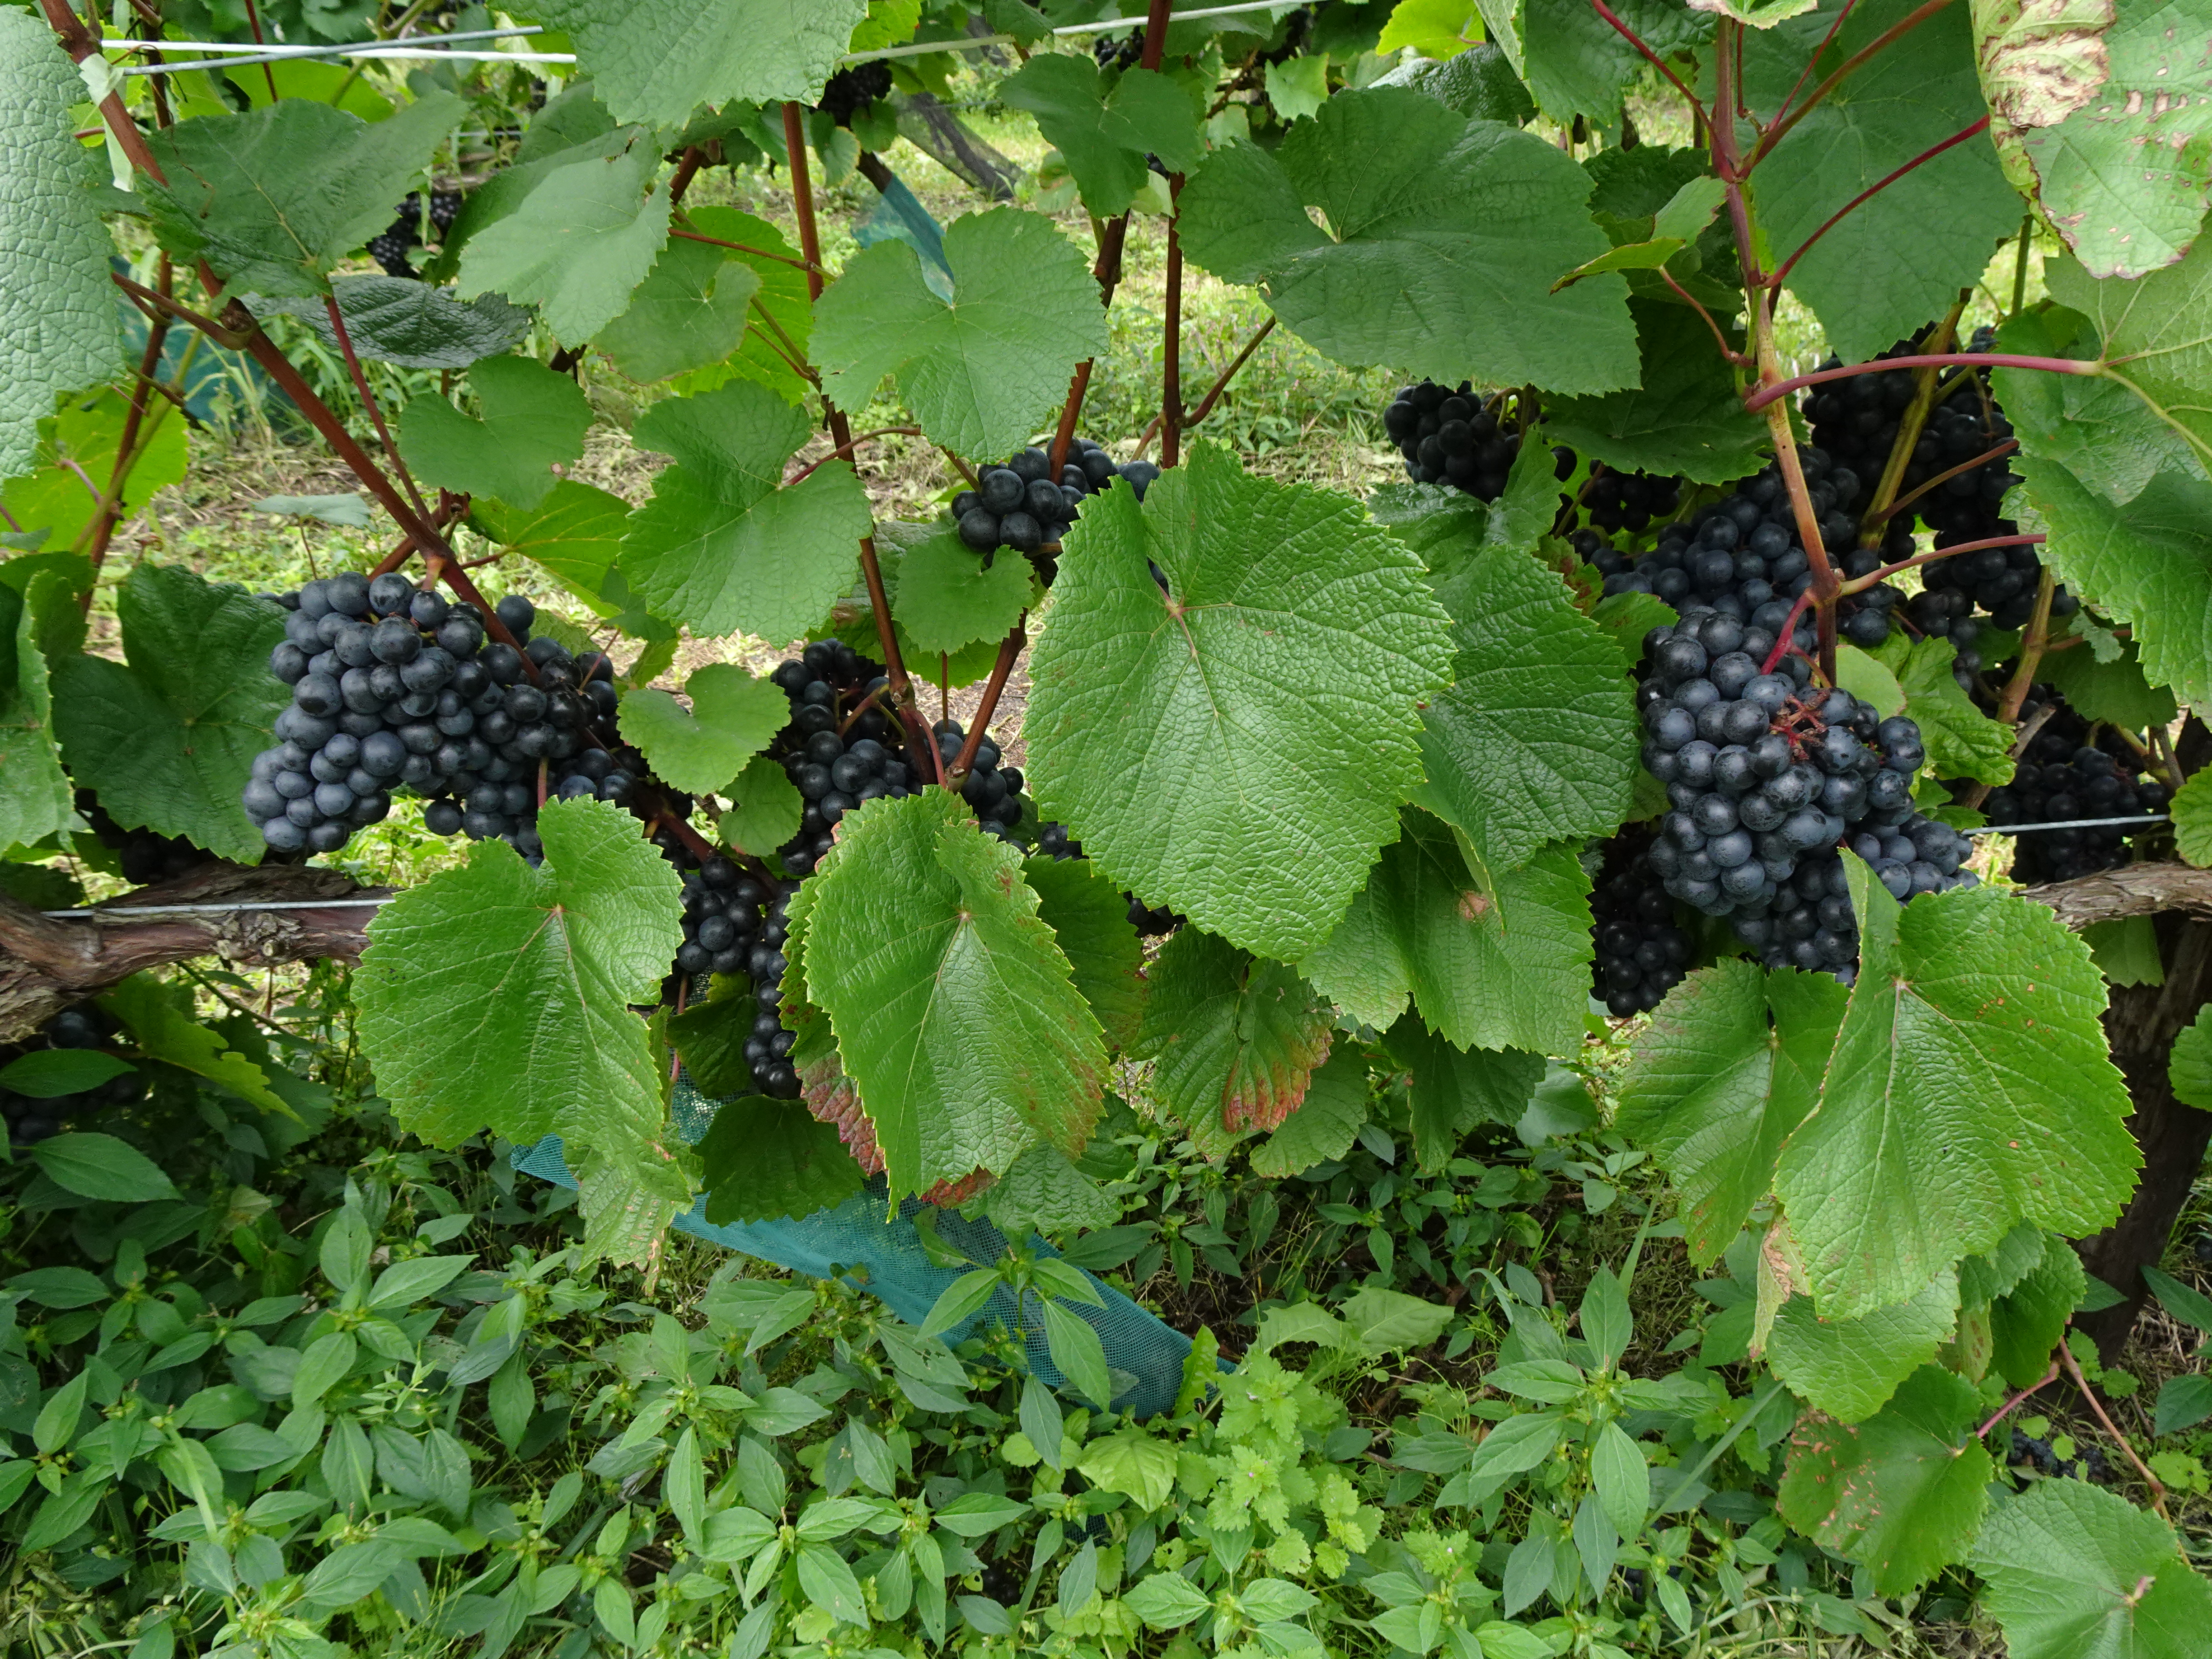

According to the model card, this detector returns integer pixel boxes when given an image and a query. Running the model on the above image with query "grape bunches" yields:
[931,718,1023,842]
[501,743,692,868]
[423,593,616,840]
[1725,818,1980,984]
[1603,451,1906,646]
[1040,817,1187,935]
[0,1001,152,1159]
[1911,588,1979,687]
[1548,441,1601,563]
[1916,328,2081,631]
[747,879,801,1101]
[1575,459,1684,534]
[952,436,1160,588]
[770,639,890,745]
[1384,382,1520,505]
[1992,746,2167,887]
[765,734,906,881]
[246,572,501,859]
[1587,820,1709,1016]
[1638,610,1922,918]
[61,759,222,888]
[677,857,769,976]
[1801,318,1957,567]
